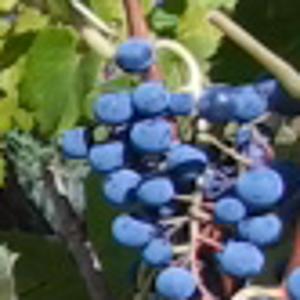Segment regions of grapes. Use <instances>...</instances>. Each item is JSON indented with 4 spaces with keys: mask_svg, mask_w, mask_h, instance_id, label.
Wrapping results in <instances>:
<instances>
[{
    "mask_svg": "<svg viewBox=\"0 0 300 300\" xmlns=\"http://www.w3.org/2000/svg\"><path fill=\"white\" fill-rule=\"evenodd\" d=\"M195 107L189 92L171 91L155 79L129 90H108L92 100V115L116 137L93 142L84 126L60 141L67 162L87 157L106 176L101 197L118 212L110 238L160 270L154 291L163 300H218L203 274L260 279L266 250L285 235L287 204L300 189V167L269 160L250 128L234 134L232 157L215 160L200 143H172L174 118Z\"/></svg>",
    "mask_w": 300,
    "mask_h": 300,
    "instance_id": "1",
    "label": "grapes"
},
{
    "mask_svg": "<svg viewBox=\"0 0 300 300\" xmlns=\"http://www.w3.org/2000/svg\"><path fill=\"white\" fill-rule=\"evenodd\" d=\"M157 58V49L144 37H128L115 51L116 68L128 75H141Z\"/></svg>",
    "mask_w": 300,
    "mask_h": 300,
    "instance_id": "3",
    "label": "grapes"
},
{
    "mask_svg": "<svg viewBox=\"0 0 300 300\" xmlns=\"http://www.w3.org/2000/svg\"><path fill=\"white\" fill-rule=\"evenodd\" d=\"M285 293L291 299L300 300V268H294L289 272Z\"/></svg>",
    "mask_w": 300,
    "mask_h": 300,
    "instance_id": "4",
    "label": "grapes"
},
{
    "mask_svg": "<svg viewBox=\"0 0 300 300\" xmlns=\"http://www.w3.org/2000/svg\"><path fill=\"white\" fill-rule=\"evenodd\" d=\"M298 110V101L280 89L271 73H261L246 83L208 86L196 102L197 115L210 125L229 121L252 125L276 111L293 116Z\"/></svg>",
    "mask_w": 300,
    "mask_h": 300,
    "instance_id": "2",
    "label": "grapes"
}]
</instances>
